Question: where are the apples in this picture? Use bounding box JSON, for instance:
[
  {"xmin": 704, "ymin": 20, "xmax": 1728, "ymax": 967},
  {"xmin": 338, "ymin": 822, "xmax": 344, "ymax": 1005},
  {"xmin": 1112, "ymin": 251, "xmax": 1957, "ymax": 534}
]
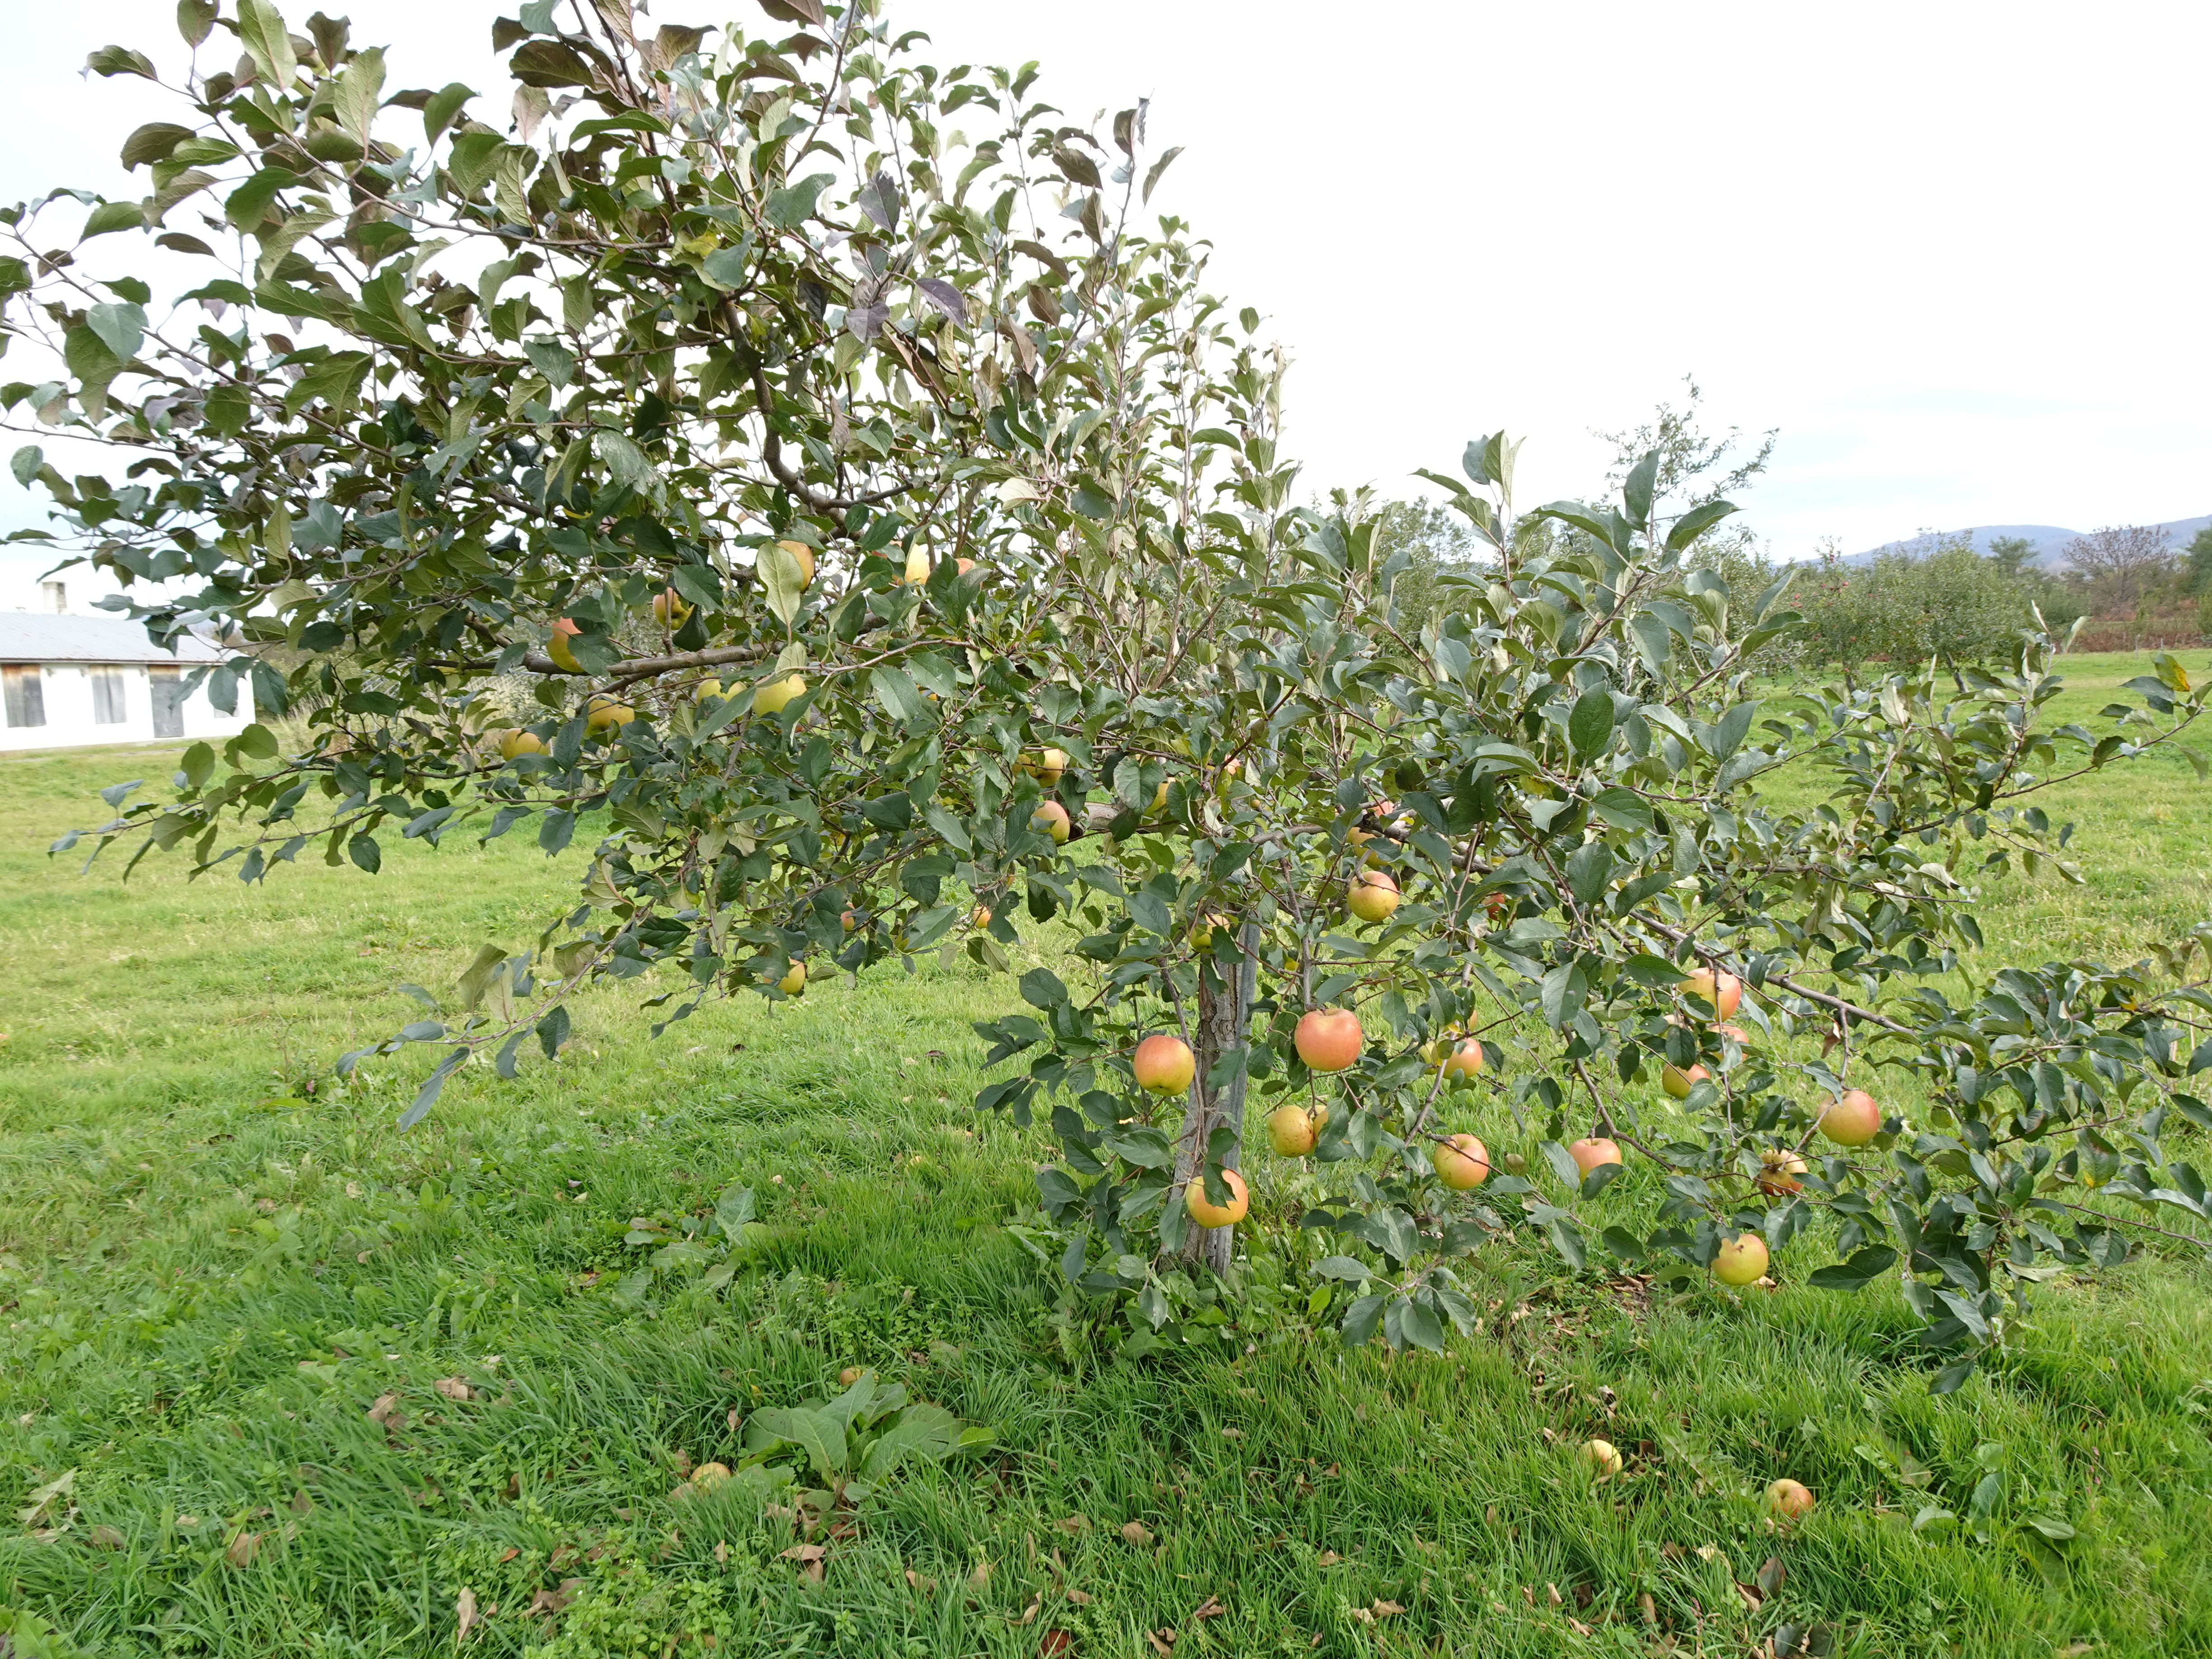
[
  {"xmin": 1188, "ymin": 912, "xmax": 1231, "ymax": 951},
  {"xmin": 1566, "ymin": 1135, "xmax": 1622, "ymax": 1187},
  {"xmin": 1294, "ymin": 1006, "xmax": 1362, "ymax": 1073},
  {"xmin": 1495, "ymin": 1152, "xmax": 1531, "ymax": 1179},
  {"xmin": 1185, "ymin": 1168, "xmax": 1249, "ymax": 1230},
  {"xmin": 1313, "ymin": 1107, "xmax": 1358, "ymax": 1149},
  {"xmin": 977, "ymin": 854, "xmax": 1017, "ymax": 894},
  {"xmin": 1212, "ymin": 754, "xmax": 1241, "ymax": 783},
  {"xmin": 695, "ymin": 676, "xmax": 751, "ymax": 728},
  {"xmin": 1814, "ymin": 1087, "xmax": 1880, "ymax": 1147},
  {"xmin": 1445, "ymin": 1004, "xmax": 1479, "ymax": 1034},
  {"xmin": 1354, "ymin": 820, "xmax": 1404, "ymax": 864},
  {"xmin": 1481, "ymin": 893, "xmax": 1522, "ymax": 921},
  {"xmin": 1406, "ymin": 1035, "xmax": 1442, "ymax": 1077},
  {"xmin": 1431, "ymin": 1035, "xmax": 1483, "ymax": 1079},
  {"xmin": 1112, "ymin": 752, "xmax": 1177, "ymax": 815},
  {"xmin": 1709, "ymin": 1231, "xmax": 1769, "ymax": 1289},
  {"xmin": 942, "ymin": 604, "xmax": 977, "ymax": 642},
  {"xmin": 1246, "ymin": 797, "xmax": 1272, "ymax": 822},
  {"xmin": 1366, "ymin": 790, "xmax": 1396, "ymax": 825},
  {"xmin": 872, "ymin": 541, "xmax": 929, "ymax": 591},
  {"xmin": 1264, "ymin": 1105, "xmax": 1310, "ymax": 1158},
  {"xmin": 972, "ymin": 906, "xmax": 1001, "ymax": 930},
  {"xmin": 1434, "ymin": 1133, "xmax": 1489, "ymax": 1190},
  {"xmin": 1703, "ymin": 1025, "xmax": 1749, "ymax": 1070},
  {"xmin": 1306, "ymin": 1094, "xmax": 1347, "ymax": 1136},
  {"xmin": 762, "ymin": 956, "xmax": 806, "ymax": 997},
  {"xmin": 753, "ymin": 670, "xmax": 807, "ymax": 727},
  {"xmin": 1139, "ymin": 775, "xmax": 1185, "ymax": 818},
  {"xmin": 500, "ymin": 728, "xmax": 552, "ymax": 771},
  {"xmin": 769, "ymin": 541, "xmax": 814, "ymax": 591},
  {"xmin": 1674, "ymin": 966, "xmax": 1741, "ymax": 1023},
  {"xmin": 1346, "ymin": 827, "xmax": 1387, "ymax": 865},
  {"xmin": 839, "ymin": 901, "xmax": 872, "ymax": 935},
  {"xmin": 652, "ymin": 582, "xmax": 700, "ymax": 632},
  {"xmin": 580, "ymin": 692, "xmax": 637, "ymax": 747},
  {"xmin": 910, "ymin": 681, "xmax": 938, "ymax": 707},
  {"xmin": 1284, "ymin": 957, "xmax": 1307, "ymax": 981},
  {"xmin": 1660, "ymin": 1056, "xmax": 1710, "ymax": 1102},
  {"xmin": 1010, "ymin": 735, "xmax": 1065, "ymax": 788},
  {"xmin": 1344, "ymin": 870, "xmax": 1399, "ymax": 923},
  {"xmin": 1025, "ymin": 798, "xmax": 1070, "ymax": 847},
  {"xmin": 1132, "ymin": 1034, "xmax": 1195, "ymax": 1097},
  {"xmin": 545, "ymin": 607, "xmax": 605, "ymax": 674},
  {"xmin": 943, "ymin": 556, "xmax": 982, "ymax": 597},
  {"xmin": 1754, "ymin": 1147, "xmax": 1807, "ymax": 1198}
]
